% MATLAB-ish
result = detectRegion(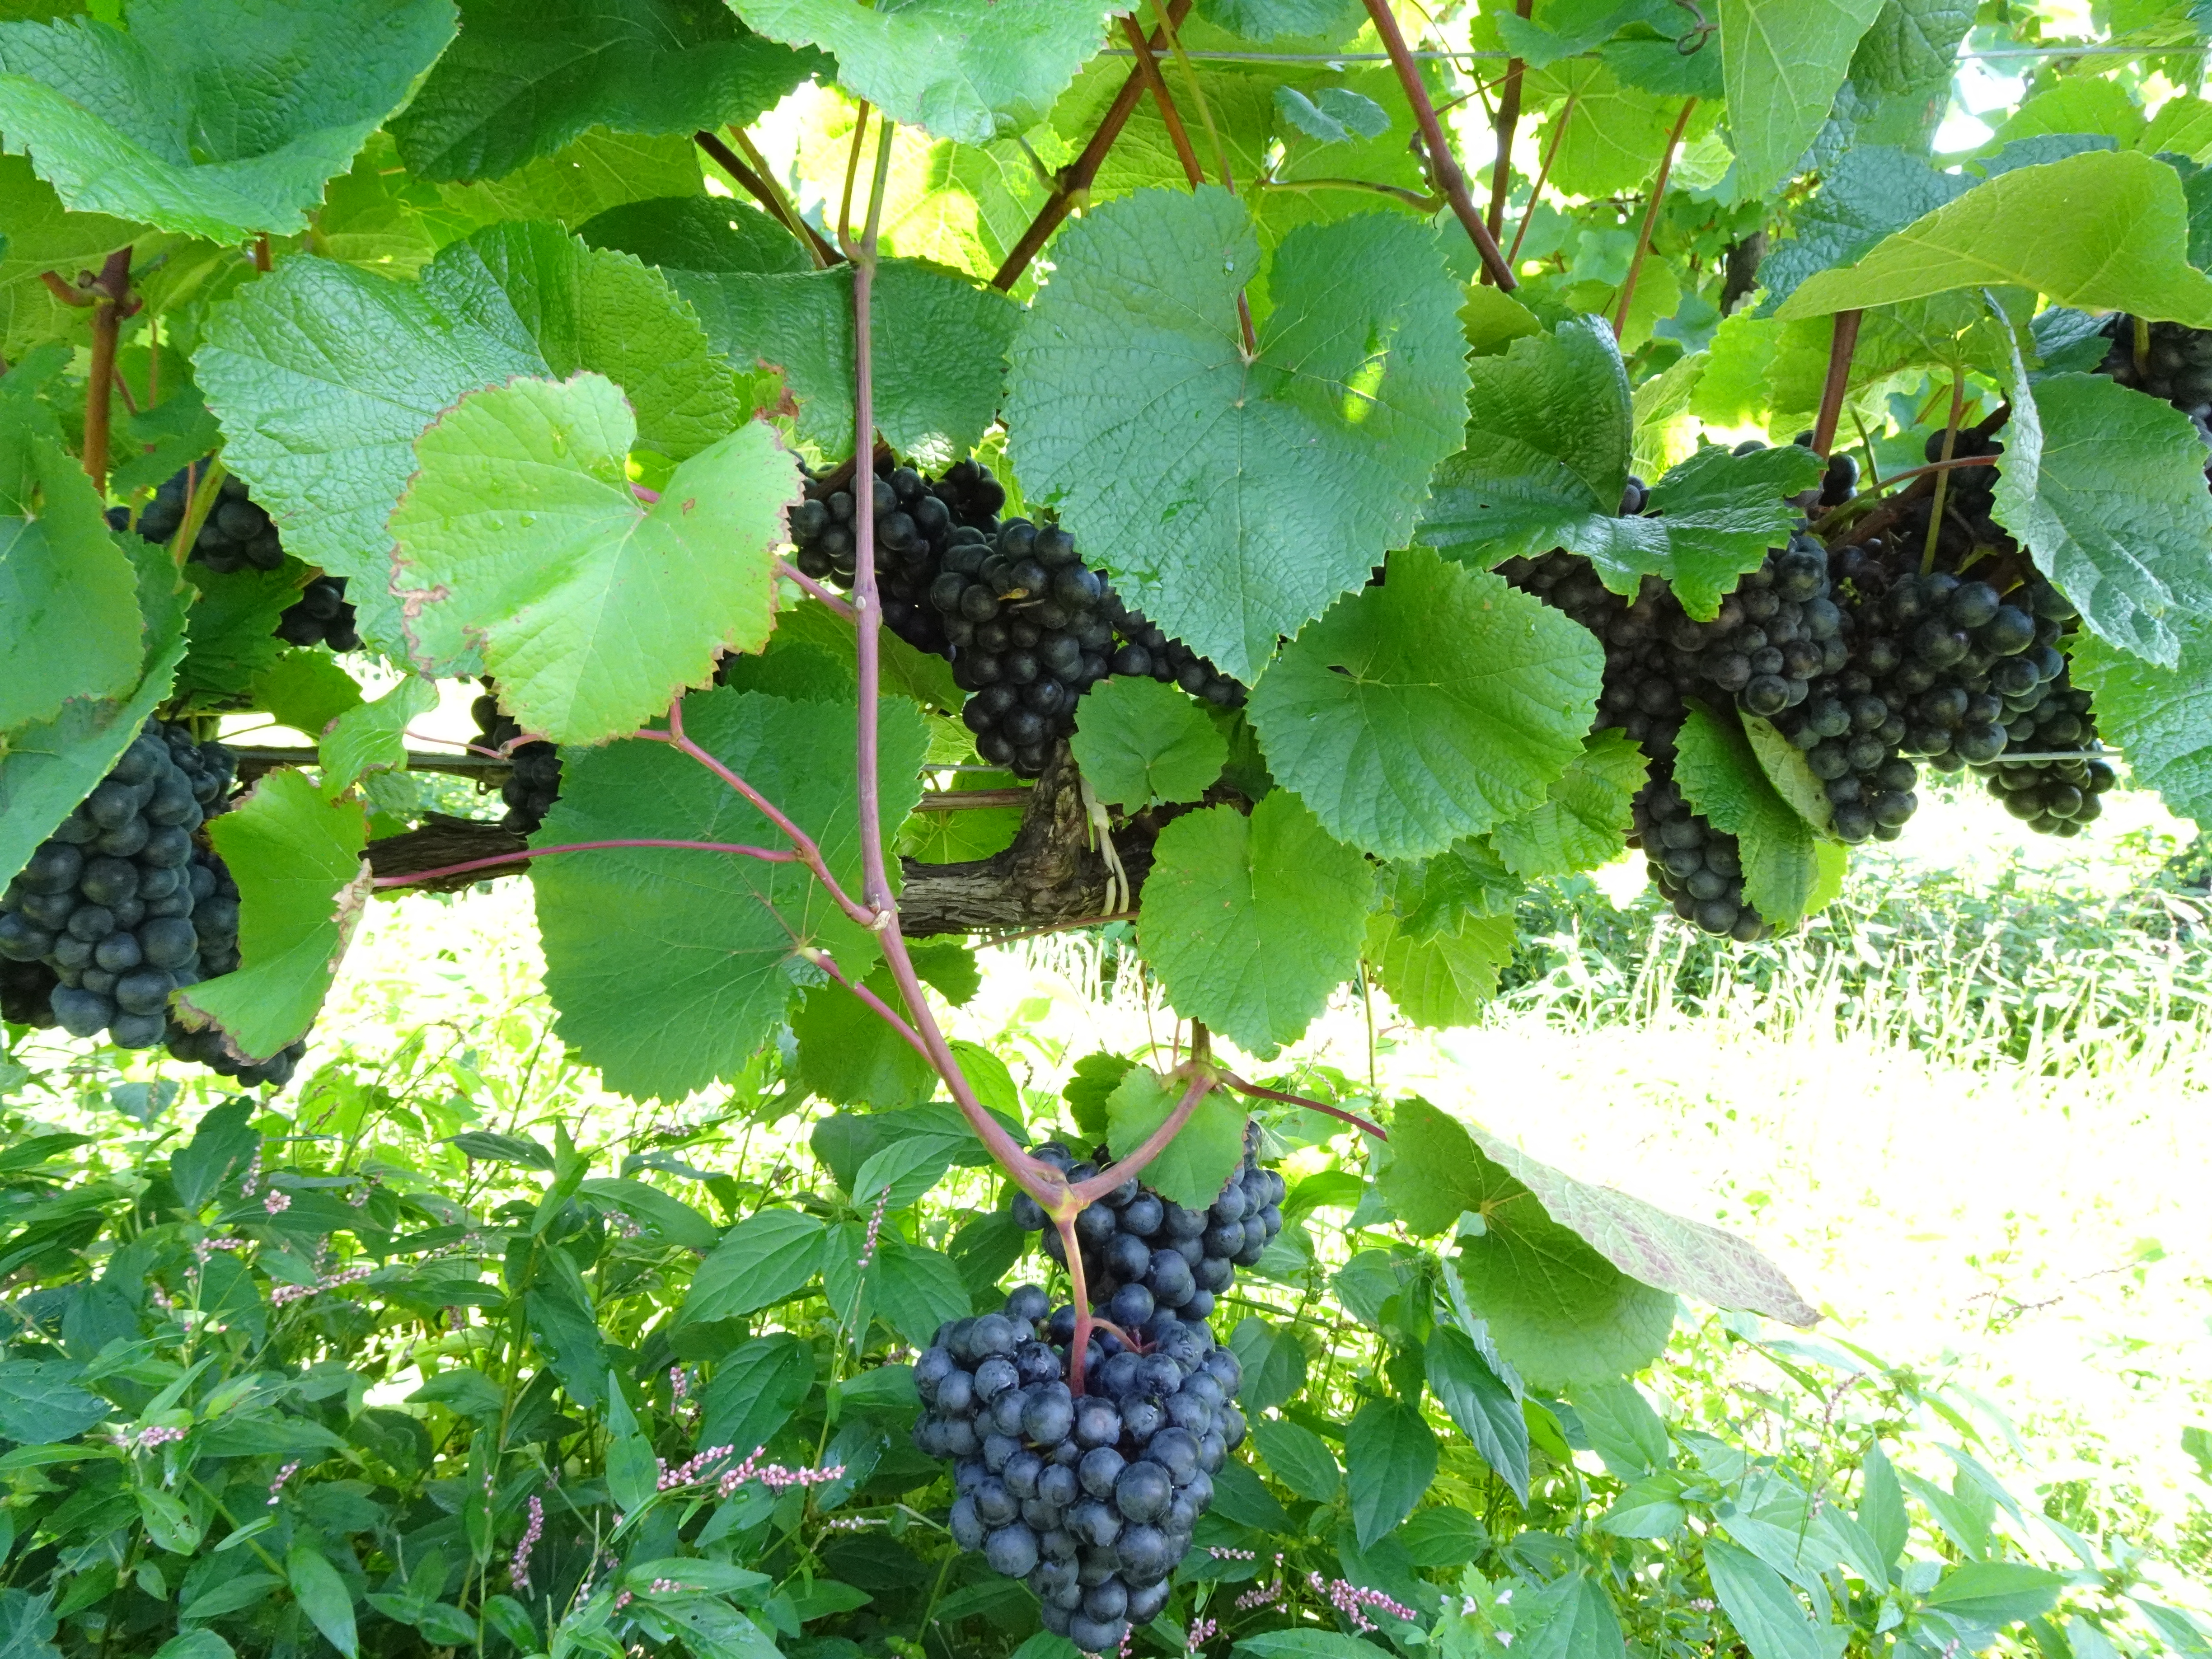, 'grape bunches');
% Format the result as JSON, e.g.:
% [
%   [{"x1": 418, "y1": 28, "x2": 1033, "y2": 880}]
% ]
[
  {"x1": 1010, "y1": 1122, "x2": 1285, "y2": 1320},
  {"x1": 1114, "y1": 609, "x2": 1249, "y2": 708},
  {"x1": 467, "y1": 675, "x2": 532, "y2": 768},
  {"x1": 1827, "y1": 502, "x2": 1958, "y2": 601},
  {"x1": 0, "y1": 954, "x2": 62, "y2": 1030},
  {"x1": 2096, "y1": 310, "x2": 2212, "y2": 471},
  {"x1": 913, "y1": 1284, "x2": 1248, "y2": 1654},
  {"x1": 160, "y1": 851, "x2": 314, "y2": 1087},
  {"x1": 1732, "y1": 431, "x2": 1860, "y2": 508},
  {"x1": 930, "y1": 517, "x2": 1112, "y2": 776},
  {"x1": 790, "y1": 450, "x2": 951, "y2": 590},
  {"x1": 1784, "y1": 530, "x2": 1920, "y2": 848},
  {"x1": 1859, "y1": 571, "x2": 2078, "y2": 774},
  {"x1": 1586, "y1": 638, "x2": 1776, "y2": 942},
  {"x1": 160, "y1": 723, "x2": 239, "y2": 839},
  {"x1": 1494, "y1": 478, "x2": 1665, "y2": 677},
  {"x1": 1970, "y1": 653, "x2": 2116, "y2": 837},
  {"x1": 0, "y1": 717, "x2": 204, "y2": 1048},
  {"x1": 1665, "y1": 509, "x2": 1823, "y2": 715},
  {"x1": 1925, "y1": 423, "x2": 2008, "y2": 544},
  {"x1": 502, "y1": 742, "x2": 563, "y2": 835},
  {"x1": 881, "y1": 447, "x2": 1004, "y2": 662},
  {"x1": 103, "y1": 457, "x2": 367, "y2": 652}
]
